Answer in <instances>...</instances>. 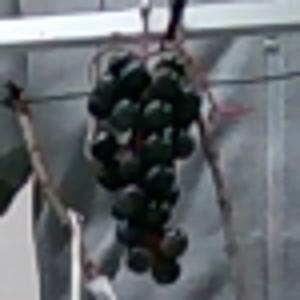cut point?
Masks as SVG:
<instances>
[{"mask_svg": "<svg viewBox=\"0 0 300 300\" xmlns=\"http://www.w3.org/2000/svg\"><path fill=\"white\" fill-rule=\"evenodd\" d=\"M137 11L143 23V59L149 55V20L154 14L152 0H139Z\"/></svg>", "mask_w": 300, "mask_h": 300, "instance_id": "obj_1", "label": "cut point"}]
</instances>
